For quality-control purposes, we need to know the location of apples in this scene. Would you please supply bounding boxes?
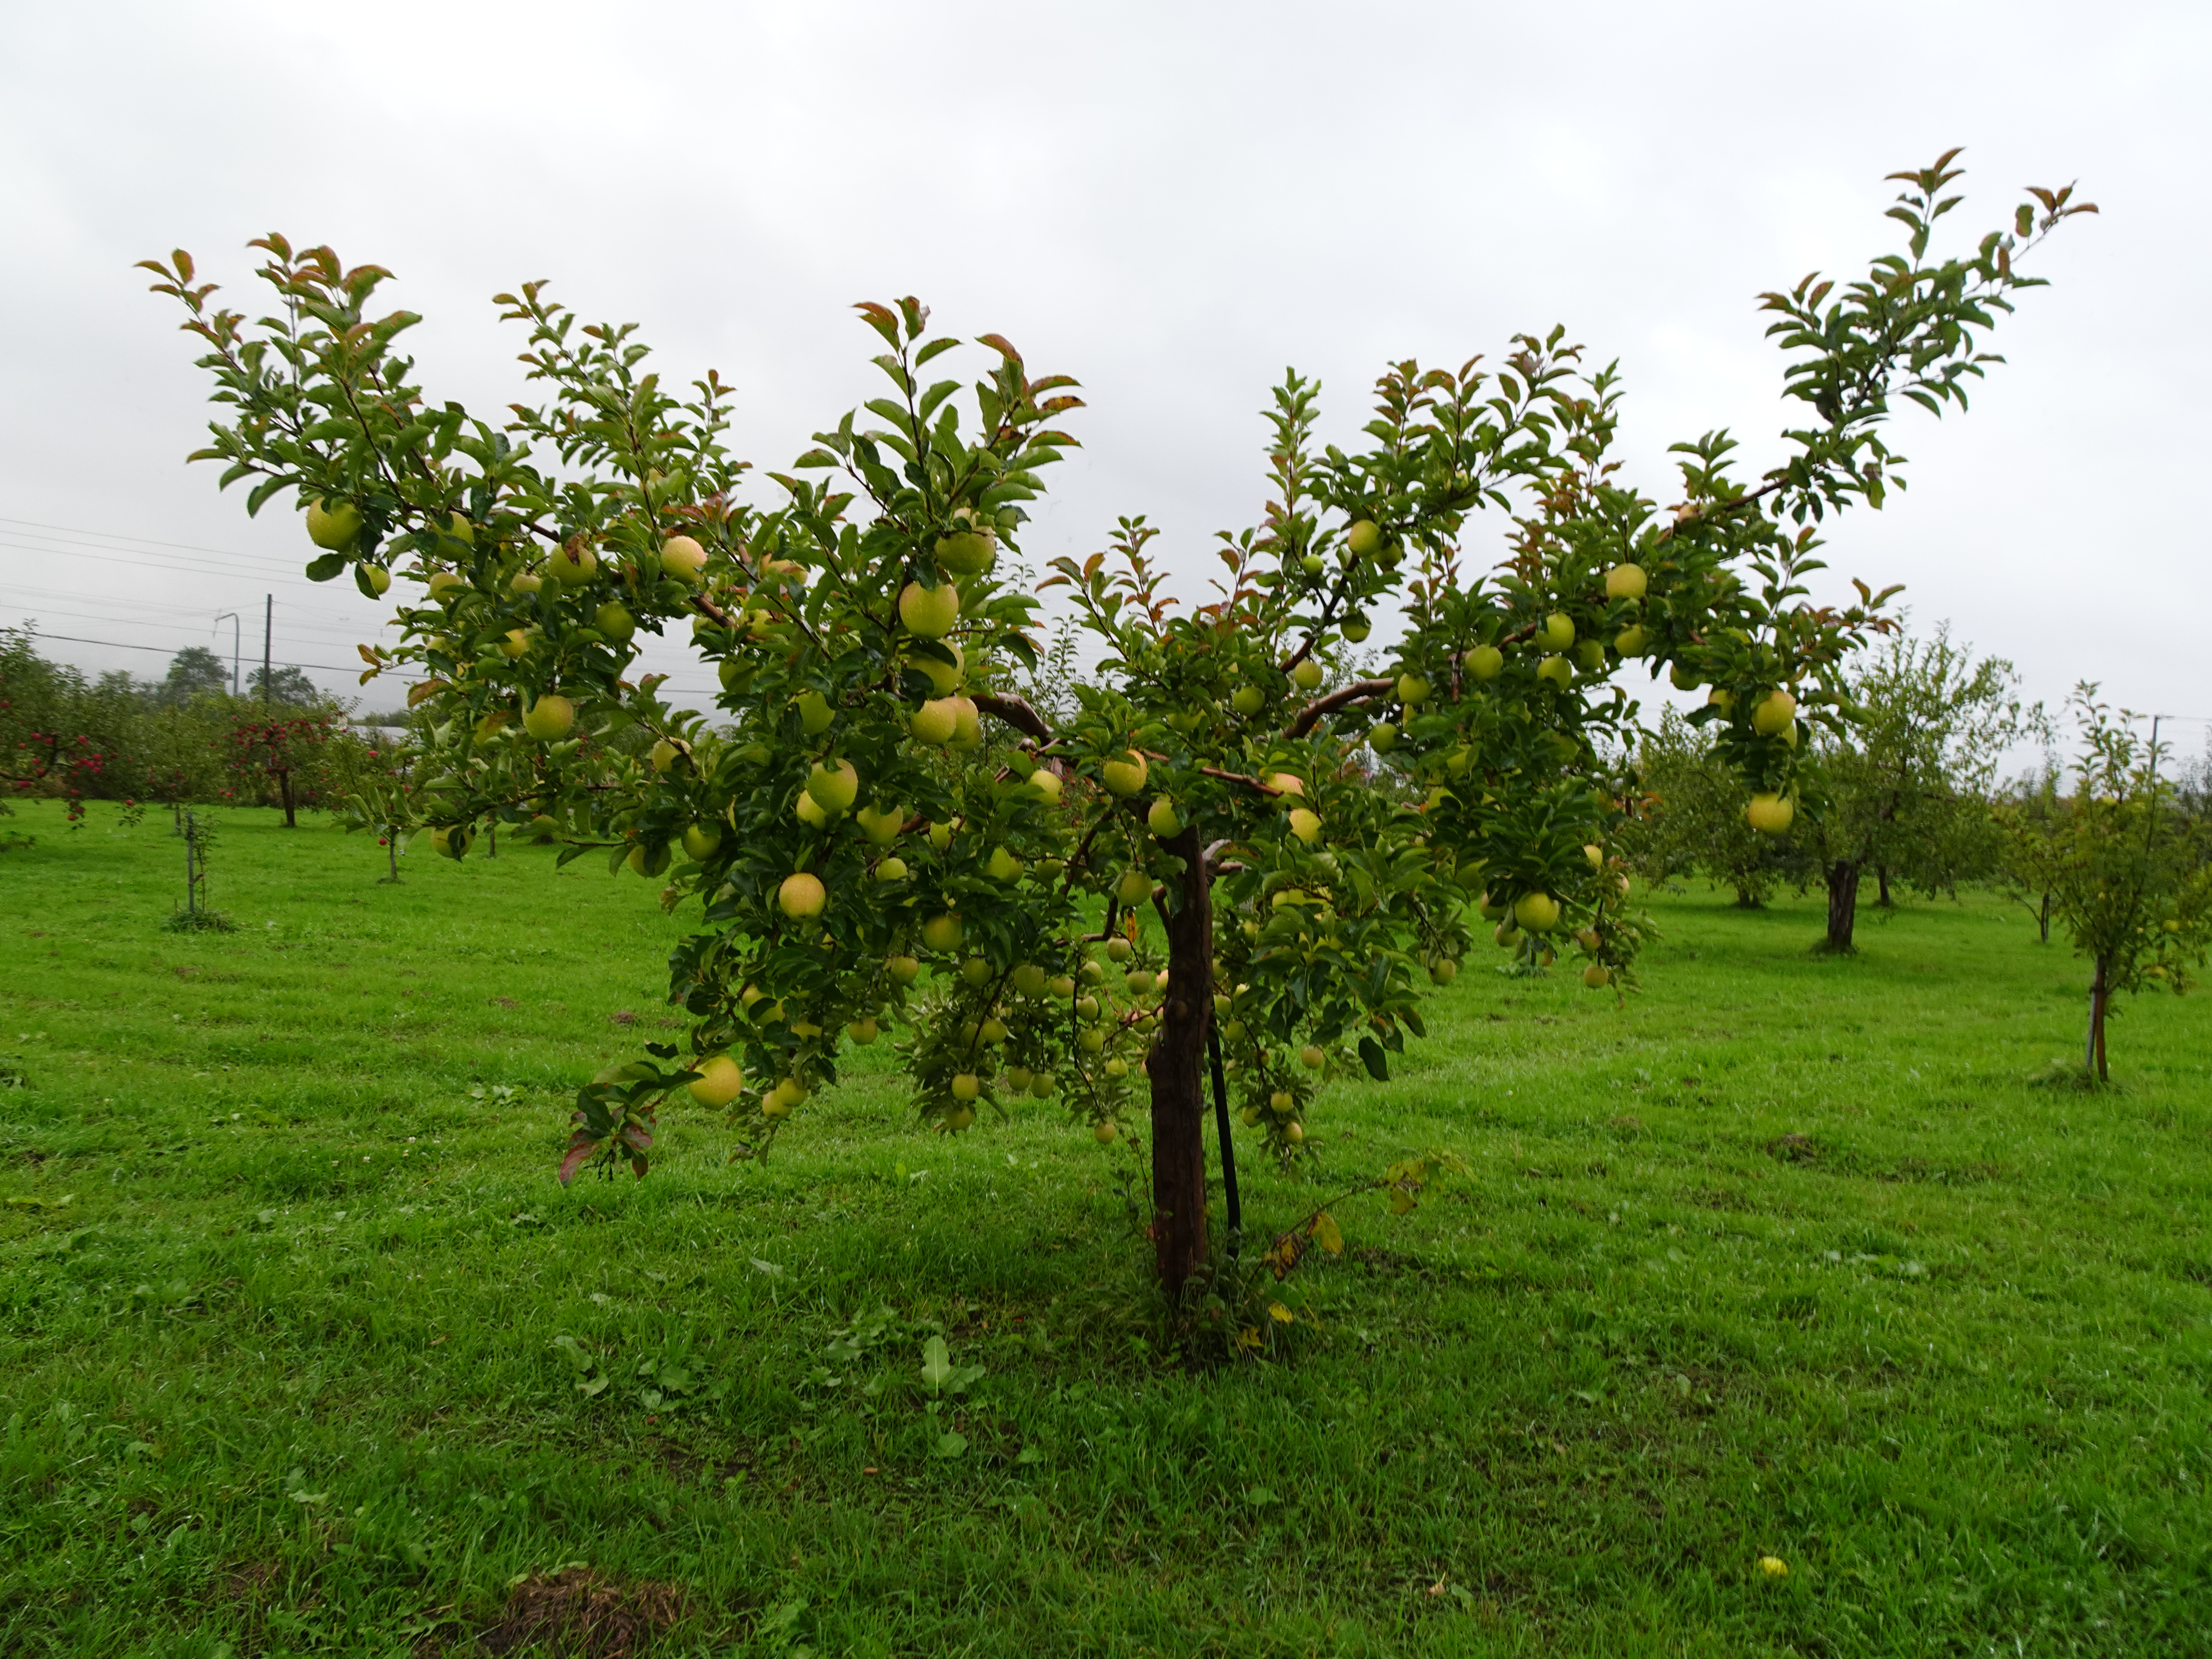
[686,1052,745,1114]
[1249,1044,1278,1072]
[995,844,1028,890]
[872,853,909,894]
[945,694,978,740]
[1279,805,1332,851]
[639,469,672,498]
[1338,608,1375,647]
[794,789,842,837]
[1130,1005,1156,1037]
[522,693,575,743]
[658,533,709,579]
[971,840,1016,889]
[1315,908,1338,930]
[1020,767,1072,812]
[501,625,537,659]
[429,571,464,607]
[1244,917,1268,945]
[1032,852,1071,887]
[603,517,633,545]
[1139,1053,1161,1081]
[1093,1115,1119,1148]
[932,508,995,577]
[1512,884,1564,935]
[1289,878,1332,914]
[546,541,597,585]
[939,714,986,752]
[1109,865,1159,912]
[681,815,729,865]
[1272,889,1298,920]
[1476,884,1517,923]
[899,638,972,698]
[773,1071,813,1110]
[975,1012,1009,1045]
[1003,1064,1038,1094]
[904,699,961,744]
[1234,981,1258,1009]
[1266,1088,1296,1115]
[1260,770,1319,815]
[1571,922,1608,954]
[692,609,738,657]
[719,650,765,693]
[427,510,476,562]
[1704,681,1741,725]
[884,952,924,987]
[845,1014,880,1049]
[1439,468,1482,512]
[1669,661,1705,693]
[1604,557,1650,606]
[1279,1119,1304,1147]
[1294,657,1326,696]
[1223,1019,1248,1044]
[1396,670,1438,707]
[955,951,1001,991]
[1155,964,1171,996]
[1229,684,1268,719]
[733,596,792,644]
[590,595,637,648]
[1145,793,1194,841]
[449,663,489,694]
[1533,654,1579,698]
[1071,993,1103,1022]
[920,906,970,955]
[1570,635,1606,678]
[784,684,837,737]
[1346,517,1386,560]
[1241,1100,1268,1135]
[756,548,811,598]
[1580,962,1612,992]
[942,1099,977,1132]
[1105,1056,1129,1083]
[304,491,367,553]
[1101,934,1133,965]
[1300,553,1326,580]
[1101,744,1151,800]
[422,632,456,667]
[1375,540,1408,571]
[1533,609,1576,653]
[1591,864,1636,908]
[1203,650,1240,688]
[1365,721,1406,760]
[855,795,907,846]
[431,824,476,865]
[804,755,859,811]
[1747,685,1805,740]
[948,1069,985,1103]
[1079,1028,1109,1058]
[1418,944,1445,973]
[357,561,392,596]
[1030,1066,1058,1099]
[1747,787,1796,842]
[626,834,672,879]
[896,575,961,638]
[1462,640,1507,685]
[1576,839,1605,877]
[1210,995,1234,1024]
[502,573,542,612]
[1611,614,1657,666]
[1223,1054,1250,1082]
[1075,958,1110,991]
[1674,500,1714,538]
[1049,967,1077,1000]
[1211,952,1231,987]
[1125,968,1154,996]
[928,808,974,860]
[1164,689,1203,733]
[741,980,791,1037]
[1413,828,1436,852]
[1427,954,1459,992]
[1493,909,1521,952]
[1191,694,1223,733]
[1297,1041,1328,1073]
[648,732,697,776]
[776,869,828,927]
[761,1086,791,1125]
